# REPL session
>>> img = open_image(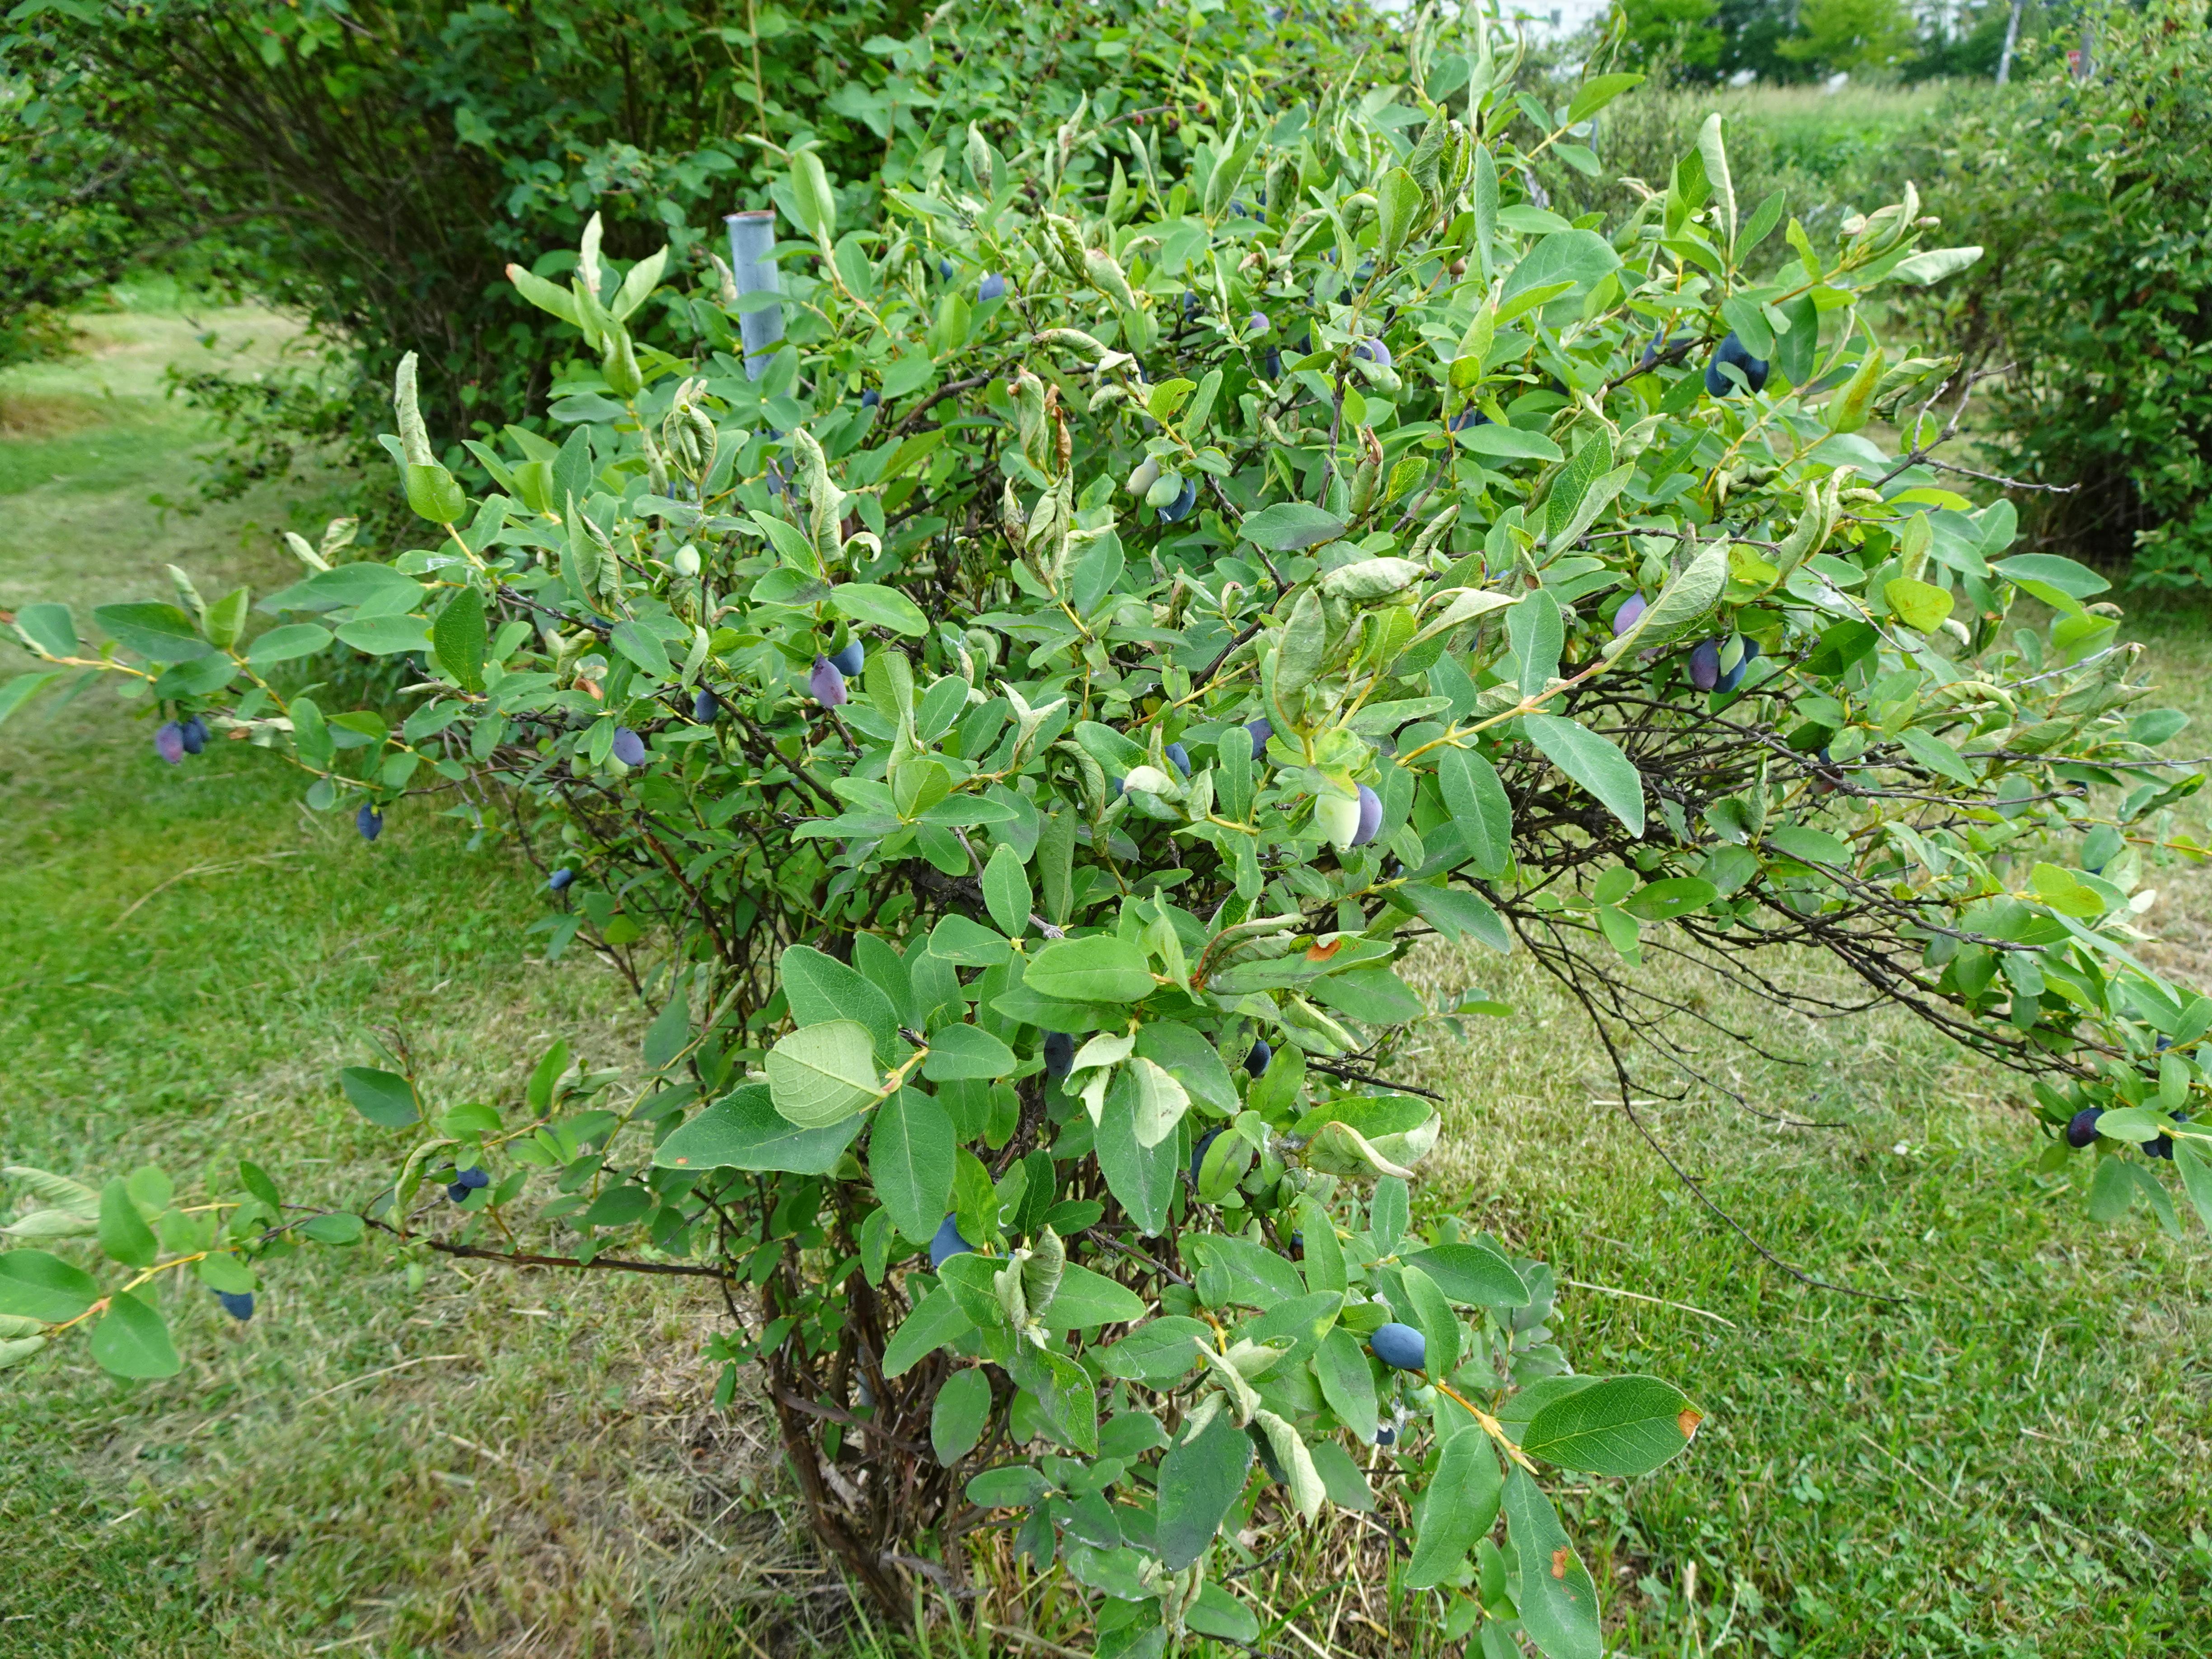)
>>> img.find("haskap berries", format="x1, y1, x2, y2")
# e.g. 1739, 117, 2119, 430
2154, 1042, 2174, 1052
1473, 409, 1495, 426
1165, 740, 1194, 781
1371, 1323, 1424, 1368
940, 258, 956, 283
1094, 362, 1112, 384
1741, 351, 1769, 396
668, 482, 676, 500
695, 685, 720, 720
1246, 312, 1271, 339
1484, 566, 1509, 581
978, 276, 1007, 300
1243, 1040, 1271, 1078
1299, 335, 1312, 356
1355, 338, 1391, 368
1114, 776, 1133, 806
2064, 1107, 2105, 1148
1243, 717, 1273, 758
1720, 630, 1749, 672
189, 717, 209, 743
1044, 1030, 1074, 1078
307, 778, 335, 811
1265, 346, 1281, 380
220, 1291, 253, 1321
458, 1165, 489, 1188
1718, 333, 1748, 379
1353, 783, 1382, 844
1304, 296, 1316, 307
1143, 311, 1158, 345
2158, 1131, 2176, 1160
1340, 288, 1355, 305
929, 1209, 974, 1270
1707, 350, 1735, 397
1128, 454, 1158, 495
1745, 636, 1760, 663
1375, 1427, 1394, 1445
1183, 291, 1205, 325
550, 867, 575, 889
1315, 777, 1357, 853
2169, 1110, 2187, 1121
1669, 326, 1693, 365
157, 721, 183, 765
1712, 654, 1745, 694
1128, 364, 1149, 385
1192, 1125, 1223, 1189
810, 657, 849, 711
1288, 1232, 1306, 1250
828, 627, 865, 682
1612, 587, 1654, 641
862, 387, 881, 408
1230, 203, 1245, 219
448, 1183, 470, 1203
1689, 635, 1720, 692
1328, 248, 1339, 265
179, 723, 203, 755
1148, 469, 1181, 507
1449, 410, 1475, 447
611, 726, 645, 765
1159, 479, 1196, 523
2143, 1138, 2159, 1157
1353, 262, 1377, 280
1359, 361, 1402, 393
998, 1252, 1015, 1261
356, 804, 382, 841
1819, 747, 1832, 765
1256, 190, 1267, 223
2086, 865, 2105, 876
1640, 332, 1665, 370
674, 543, 703, 581
2156, 1036, 2171, 1048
